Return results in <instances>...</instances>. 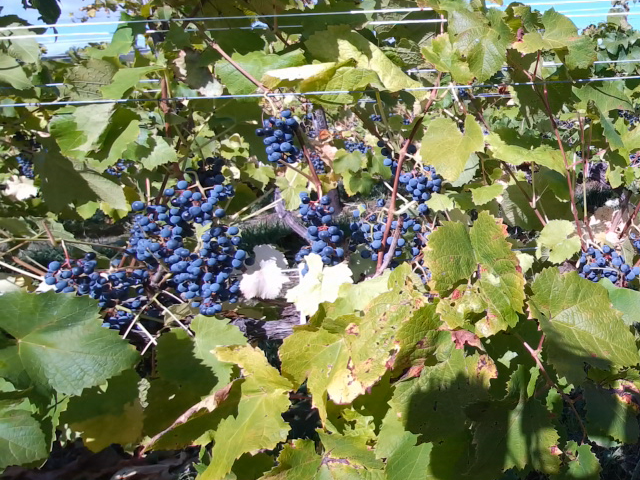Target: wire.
Instances as JSON below:
<instances>
[{"instance_id": "1", "label": "wire", "mask_w": 640, "mask_h": 480, "mask_svg": "<svg viewBox=\"0 0 640 480\" xmlns=\"http://www.w3.org/2000/svg\"><path fill=\"white\" fill-rule=\"evenodd\" d=\"M433 7H410V8H381L370 10H317L302 12H272L257 13L249 15H213V16H183L173 18H145L140 20H89L74 23H49L42 25H16L0 27V32H11L18 30H44L51 28H76L91 25H142L147 23H175L185 21H215V20H251L259 18L274 17H304L319 15H378L391 16L396 13L412 12H433Z\"/></svg>"}, {"instance_id": "2", "label": "wire", "mask_w": 640, "mask_h": 480, "mask_svg": "<svg viewBox=\"0 0 640 480\" xmlns=\"http://www.w3.org/2000/svg\"><path fill=\"white\" fill-rule=\"evenodd\" d=\"M620 80H640V75H618V76H602L592 79H544V80H529L522 82H501V83H489V84H456V85H437V86H424V87H403L402 92H426V91H439V90H458V89H491V88H503V87H524L531 85H546V84H594L604 81H620Z\"/></svg>"}, {"instance_id": "3", "label": "wire", "mask_w": 640, "mask_h": 480, "mask_svg": "<svg viewBox=\"0 0 640 480\" xmlns=\"http://www.w3.org/2000/svg\"><path fill=\"white\" fill-rule=\"evenodd\" d=\"M160 97H133V98H118L107 100H78V101H53V102H14V103H1V108H16V107H55V106H80V105H109L120 103H135V102H160Z\"/></svg>"}, {"instance_id": "4", "label": "wire", "mask_w": 640, "mask_h": 480, "mask_svg": "<svg viewBox=\"0 0 640 480\" xmlns=\"http://www.w3.org/2000/svg\"><path fill=\"white\" fill-rule=\"evenodd\" d=\"M115 35L114 31L111 32H100V33H44V34H14V35H3L0 36V41L6 40H17V39H46V38H54V39H64V38H81V39H90V38H112Z\"/></svg>"}, {"instance_id": "5", "label": "wire", "mask_w": 640, "mask_h": 480, "mask_svg": "<svg viewBox=\"0 0 640 480\" xmlns=\"http://www.w3.org/2000/svg\"><path fill=\"white\" fill-rule=\"evenodd\" d=\"M376 88H365L356 90H292V91H273L269 92V97L275 96H294V95H358L367 93H376Z\"/></svg>"}, {"instance_id": "6", "label": "wire", "mask_w": 640, "mask_h": 480, "mask_svg": "<svg viewBox=\"0 0 640 480\" xmlns=\"http://www.w3.org/2000/svg\"><path fill=\"white\" fill-rule=\"evenodd\" d=\"M630 15H640V10H628L620 12H582L566 14V19L584 18V17H622Z\"/></svg>"}, {"instance_id": "7", "label": "wire", "mask_w": 640, "mask_h": 480, "mask_svg": "<svg viewBox=\"0 0 640 480\" xmlns=\"http://www.w3.org/2000/svg\"><path fill=\"white\" fill-rule=\"evenodd\" d=\"M614 0H545L541 2H526V7H543L548 5H566V4H597V3H613Z\"/></svg>"}, {"instance_id": "8", "label": "wire", "mask_w": 640, "mask_h": 480, "mask_svg": "<svg viewBox=\"0 0 640 480\" xmlns=\"http://www.w3.org/2000/svg\"><path fill=\"white\" fill-rule=\"evenodd\" d=\"M272 29L273 25L270 23L258 24V25H229L219 27L202 26L201 30L206 32H221L231 30H260V29Z\"/></svg>"}]
</instances>
